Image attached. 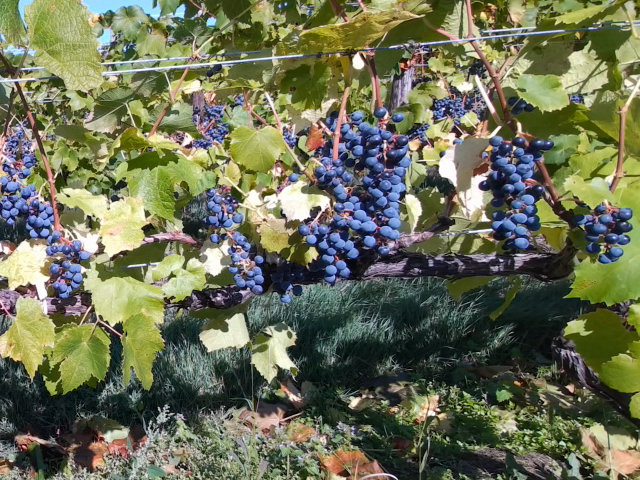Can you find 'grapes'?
<instances>
[{
    "mask_svg": "<svg viewBox=\"0 0 640 480\" xmlns=\"http://www.w3.org/2000/svg\"><path fill=\"white\" fill-rule=\"evenodd\" d=\"M364 113L361 110H354L351 113V120L358 125L357 133L351 129L349 123L342 125V140L339 143L338 159L333 158V142H327L324 146L315 149V155L321 158V165L313 169V176L318 180V189L327 191L334 198V212L344 214L351 209L352 217L342 218L340 215L333 217L334 225L339 229V233H332L329 225L300 224L298 233L301 237H306L309 246H318L321 251L319 258L309 263V270L325 271L323 281L326 284H333L337 281V274L341 278H348L352 273V268L346 259H337L338 254H345L346 258L355 259L359 257L360 250L355 247V243L350 240L351 232L357 231L362 237V243L366 247H375L377 238L373 235L377 231V224L374 217L369 212H376L379 222L389 219L388 226H380L378 234L381 237L398 240L400 238L399 228L402 221L399 217L401 194L406 192V183L403 176L406 168L411 165V158L405 156L409 150L408 138L405 135H398L394 139V134L379 125H372L363 121ZM382 140L387 144L394 142L395 147L382 154ZM351 151L354 157H361L362 160L356 163L354 158H348ZM357 171H370L362 179V188L375 198L373 202L366 205L361 202V198L351 195L345 191L342 182H352L354 175L346 170L353 168Z\"/></svg>",
    "mask_w": 640,
    "mask_h": 480,
    "instance_id": "01657485",
    "label": "grapes"
},
{
    "mask_svg": "<svg viewBox=\"0 0 640 480\" xmlns=\"http://www.w3.org/2000/svg\"><path fill=\"white\" fill-rule=\"evenodd\" d=\"M489 145H490V146H491V147H493V148H492V149H491V162H492V170H493V171H492V172H491V173H490V174H489V175H488V177H487V180H483V181H481V182H480V183H479V189H480V190H481V191H489V190H492V191H493V196H494V197H492V198H491V199H490V205H491V206H492V207H502V206H503V205H504V204H505V203H506V204H507V205H509V206H512V207H513V208H514V209H522V208H523V212H516V213H510V212H506V211H505V210H495V211H494V212H493V213H492V222H491V228H493V229H494V231H495V232H494V233H493V238H494V239H495V240H496V241H504V240H505V239H506V238H511V237H512V236H513V235H514V234H515V239H507V240H506V241H505V244H503V245H502V246H501V249H502V250H508V249H521V250H528V249H529V248H530V245H529V238H528V237H527V236H526V235H527V229H528V230H529V231H539V230H540V229H541V223H540V216H539V215H538V214H537V213H538V208H537V206H536V205H537V204H538V203H539V202H540V201H541V198H542V196H543V195H544V194H545V187H544V186H543V185H542V184H535V185H533V186H532V187H530V186H527V183H526V182H525V181H523V180H530V179H531V178H532V176H533V169H532V168H533V167H534V166H535V161H541V160H542V159H543V153H544V152H545V151H550V150H551V149H552V148H553V147H554V146H555V142H554V141H553V140H552V139H543V138H534V139H532V140H531V141H530V142H529V146H526V142H525V138H524V137H523V136H517V137H516V138H514V139H513V140H512V144H511V143H505V139H504V138H503V137H502V136H492V137H491V138H490V139H489ZM513 147H514V148H517V149H516V150H515V151H514V156H515V157H516V158H517V159H521V160H520V163H518V164H517V165H516V164H513V163H509V159H508V158H507V157H511V156H512V155H513Z\"/></svg>",
    "mask_w": 640,
    "mask_h": 480,
    "instance_id": "b958b902",
    "label": "grapes"
},
{
    "mask_svg": "<svg viewBox=\"0 0 640 480\" xmlns=\"http://www.w3.org/2000/svg\"><path fill=\"white\" fill-rule=\"evenodd\" d=\"M24 169H17L10 165V162L4 161L3 171L9 175L0 176L1 192L4 194L0 197V216L5 220L7 225H14L19 210L25 214H29L25 219V229L29 231L31 238L46 237L48 243H55L61 238L60 232L53 231L50 234V228L54 222L53 208L47 202H41L37 198L39 191L34 183L21 188V184L17 182L12 175H17L19 179H26L31 174V167L36 165V158L33 155H24L21 159Z\"/></svg>",
    "mask_w": 640,
    "mask_h": 480,
    "instance_id": "0513c4c2",
    "label": "grapes"
},
{
    "mask_svg": "<svg viewBox=\"0 0 640 480\" xmlns=\"http://www.w3.org/2000/svg\"><path fill=\"white\" fill-rule=\"evenodd\" d=\"M607 211L608 208L604 204L594 208V214L599 216L596 224V218L592 214H576L573 217L576 225H584L585 240L588 242L585 245V251L588 254H597L601 251L600 244L596 242L600 239V235H605L606 244H617L610 246L607 253L596 257V261L602 265H612L620 260L625 254L620 246L631 242V237L625 232L634 228V224L629 221L633 216V210L630 207H621L617 213L612 214H605Z\"/></svg>",
    "mask_w": 640,
    "mask_h": 480,
    "instance_id": "84f90ec7",
    "label": "grapes"
},
{
    "mask_svg": "<svg viewBox=\"0 0 640 480\" xmlns=\"http://www.w3.org/2000/svg\"><path fill=\"white\" fill-rule=\"evenodd\" d=\"M206 196L209 198L208 209L216 215H209L203 219L205 226L231 228L233 224H240L244 221V215L240 212H234L238 199L231 194L224 196L225 212L222 211V196L217 194L214 188L206 190Z\"/></svg>",
    "mask_w": 640,
    "mask_h": 480,
    "instance_id": "f8a65327",
    "label": "grapes"
},
{
    "mask_svg": "<svg viewBox=\"0 0 640 480\" xmlns=\"http://www.w3.org/2000/svg\"><path fill=\"white\" fill-rule=\"evenodd\" d=\"M304 265L302 263H289L284 261L282 266L275 267L273 274L271 275V281L274 283L271 289L280 296V301L283 304H289L291 302V296L285 294L291 292L295 296H301L303 294V287L300 284H292L290 281L303 282L305 275L302 271Z\"/></svg>",
    "mask_w": 640,
    "mask_h": 480,
    "instance_id": "5460f4e3",
    "label": "grapes"
},
{
    "mask_svg": "<svg viewBox=\"0 0 640 480\" xmlns=\"http://www.w3.org/2000/svg\"><path fill=\"white\" fill-rule=\"evenodd\" d=\"M61 267L63 269H67L61 274V277L63 279L71 280L70 285H67L64 282H54L52 284V288L54 290H58V296L61 299H68L70 294L73 292V289H79L81 287V282L83 281V275L80 273L82 271V266L80 264H72L70 261H62L61 263L53 261L49 265V271L52 274H57Z\"/></svg>",
    "mask_w": 640,
    "mask_h": 480,
    "instance_id": "83cd7487",
    "label": "grapes"
},
{
    "mask_svg": "<svg viewBox=\"0 0 640 480\" xmlns=\"http://www.w3.org/2000/svg\"><path fill=\"white\" fill-rule=\"evenodd\" d=\"M243 271L244 268L242 266L231 265L227 268L229 274H235L233 280L237 287L251 288L255 295H260L263 292V284L265 283L264 270L260 266H251L246 273V280L240 274H237Z\"/></svg>",
    "mask_w": 640,
    "mask_h": 480,
    "instance_id": "e5b3c951",
    "label": "grapes"
},
{
    "mask_svg": "<svg viewBox=\"0 0 640 480\" xmlns=\"http://www.w3.org/2000/svg\"><path fill=\"white\" fill-rule=\"evenodd\" d=\"M61 252L68 259L76 258L83 262H88L92 257V253L87 249H82V242L80 240H74L70 245L56 244L48 245L45 248L47 255H54Z\"/></svg>",
    "mask_w": 640,
    "mask_h": 480,
    "instance_id": "2adb6a1f",
    "label": "grapes"
},
{
    "mask_svg": "<svg viewBox=\"0 0 640 480\" xmlns=\"http://www.w3.org/2000/svg\"><path fill=\"white\" fill-rule=\"evenodd\" d=\"M232 238L237 245H242L243 251L237 253V249L235 247H229L227 249L229 260L232 263H239L241 259L247 260L250 257V251L252 250V245L247 242V236L242 234L239 230H234L232 232Z\"/></svg>",
    "mask_w": 640,
    "mask_h": 480,
    "instance_id": "ef6de9ee",
    "label": "grapes"
},
{
    "mask_svg": "<svg viewBox=\"0 0 640 480\" xmlns=\"http://www.w3.org/2000/svg\"><path fill=\"white\" fill-rule=\"evenodd\" d=\"M339 112L332 111L329 116L325 118V124L329 126L330 131H335L338 123Z\"/></svg>",
    "mask_w": 640,
    "mask_h": 480,
    "instance_id": "1ff8f66d",
    "label": "grapes"
}]
</instances>
